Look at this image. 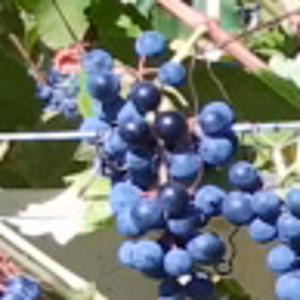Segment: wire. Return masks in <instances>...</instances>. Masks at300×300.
<instances>
[{"instance_id": "obj_1", "label": "wire", "mask_w": 300, "mask_h": 300, "mask_svg": "<svg viewBox=\"0 0 300 300\" xmlns=\"http://www.w3.org/2000/svg\"><path fill=\"white\" fill-rule=\"evenodd\" d=\"M85 137L83 130H14L0 132V141L14 142H66L82 141Z\"/></svg>"}]
</instances>
